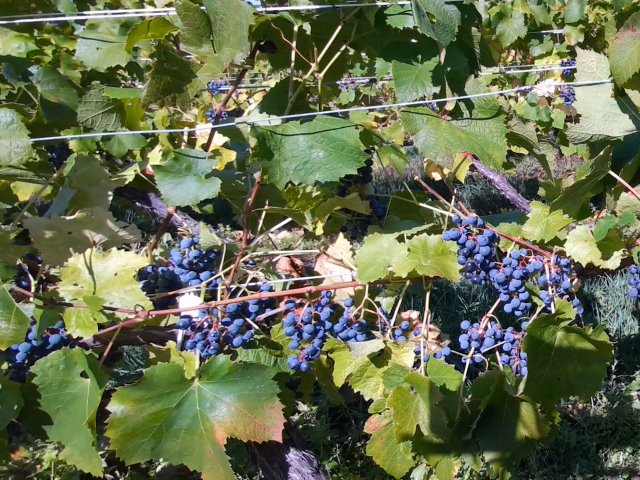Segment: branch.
<instances>
[{"instance_id":"obj_1","label":"branch","mask_w":640,"mask_h":480,"mask_svg":"<svg viewBox=\"0 0 640 480\" xmlns=\"http://www.w3.org/2000/svg\"><path fill=\"white\" fill-rule=\"evenodd\" d=\"M263 179V175L259 174L256 181L253 184L252 187V191L249 195V199L247 202V206H246V210H245V217H244V225H243V231H242V235H243V242L241 247L239 248L237 255H236V259L232 265V268L230 270L229 276L226 279V288L224 290L223 296L221 300H215L206 304H200V305H196L194 307H180V308H176V309H165V310H152V311H146V310H132V309H127V308H120V307H114V306H104L103 310L104 311H112V312H118V313H125V314H129V315H143V316H164V315H168V314H178V313H182V312H197L199 310H203V309H209L218 305H223V304H228V303H240V302H244V301H250V300H258V299H263V298H272V297H280V296H288V295H292V294H309V293H313L315 291H321V290H326V289H348L351 287H356V286H369V285H379V284H388V283H393V284H399V283H405V282H411V283H416V282H421L423 281L422 277H416V278H399V279H378L377 281H370L367 283H359L358 281H353V282H349V283H345V284H323V285H318V286H305L304 288H294V289H289L286 291H277V292H269V293H257V294H253V295H248V296H242V297H237V298H228V295L230 293V288L229 285H231V282L234 279L235 273L237 271L238 265L241 261V257L247 247L248 244V228H249V219H250V212H251V208L252 205L254 203V198L255 195L257 193V189L261 183Z\"/></svg>"},{"instance_id":"obj_2","label":"branch","mask_w":640,"mask_h":480,"mask_svg":"<svg viewBox=\"0 0 640 480\" xmlns=\"http://www.w3.org/2000/svg\"><path fill=\"white\" fill-rule=\"evenodd\" d=\"M359 12V8L355 7L342 21L341 23H339L336 28H335V32L332 34V36L330 37V39L324 44L323 50H320L318 53V56L316 58V60L312 63V65L308 68V70L305 72L304 76L302 77V79L299 81V83L296 85L295 89H294V93L291 94L289 100L286 103L285 109L283 111V114H289L291 106L293 104V102L295 101L296 97L299 95V92L301 90V88L304 86V84L306 83V81L309 79L310 75L312 74V72L315 70V68L321 63L324 54L328 53V49L329 47L334 43V41L336 40V38L338 37V34L340 33V30L346 26L349 21Z\"/></svg>"},{"instance_id":"obj_3","label":"branch","mask_w":640,"mask_h":480,"mask_svg":"<svg viewBox=\"0 0 640 480\" xmlns=\"http://www.w3.org/2000/svg\"><path fill=\"white\" fill-rule=\"evenodd\" d=\"M13 290L15 292L21 294V295L34 297L36 299L41 300L42 302H45V303H48V304L54 305V306L66 307V308H75V309H86L88 307L87 303L77 304V303H68V302L56 301V300L47 298V297H45V296H43L41 294H38L36 292L23 290V289L19 288L18 286H14Z\"/></svg>"},{"instance_id":"obj_4","label":"branch","mask_w":640,"mask_h":480,"mask_svg":"<svg viewBox=\"0 0 640 480\" xmlns=\"http://www.w3.org/2000/svg\"><path fill=\"white\" fill-rule=\"evenodd\" d=\"M484 229H492L495 233L499 234L501 237L508 238L511 241H513L514 243L522 245V246H525V247L529 248L530 250L534 251L537 254L544 255L548 259H553L554 258V255L551 252L545 251L544 249H540V248L534 246L530 242L524 241V240L519 239L517 237H512L511 235H507L505 232L498 230L495 226L487 224V222H484Z\"/></svg>"},{"instance_id":"obj_5","label":"branch","mask_w":640,"mask_h":480,"mask_svg":"<svg viewBox=\"0 0 640 480\" xmlns=\"http://www.w3.org/2000/svg\"><path fill=\"white\" fill-rule=\"evenodd\" d=\"M246 73H247L246 69H243L239 73V75L234 80L233 84L231 85L230 89L226 92V94L224 95L223 99L219 103L218 108H217L216 113H215L214 118H213V124L214 125L218 124V120L220 118V115H221V112H222L224 106L226 105V103L228 102L230 96L234 93V91L236 90L237 86L239 85V83L241 82L243 77L246 75Z\"/></svg>"},{"instance_id":"obj_6","label":"branch","mask_w":640,"mask_h":480,"mask_svg":"<svg viewBox=\"0 0 640 480\" xmlns=\"http://www.w3.org/2000/svg\"><path fill=\"white\" fill-rule=\"evenodd\" d=\"M175 210H176L175 206H172V205L168 206V212H167L165 218L163 219V221H162V223H161V225H160V227H159L154 239L152 240V242L150 244V248L151 249L155 248L156 244L158 243L159 239L161 238V236H162V234H163V232L165 230V227L168 224V222L170 221V219H171V217H172V215H173Z\"/></svg>"},{"instance_id":"obj_7","label":"branch","mask_w":640,"mask_h":480,"mask_svg":"<svg viewBox=\"0 0 640 480\" xmlns=\"http://www.w3.org/2000/svg\"><path fill=\"white\" fill-rule=\"evenodd\" d=\"M446 186L449 189V191L452 193V195L456 198V200L458 201L459 205L461 206V208L463 209V212L467 215H471V212L468 211L464 205V203L462 202V200L460 199V197L455 193L454 189L452 188V186L449 184V182H446Z\"/></svg>"},{"instance_id":"obj_8","label":"branch","mask_w":640,"mask_h":480,"mask_svg":"<svg viewBox=\"0 0 640 480\" xmlns=\"http://www.w3.org/2000/svg\"><path fill=\"white\" fill-rule=\"evenodd\" d=\"M262 41H263V37L259 36L258 39H257V43L253 46L252 50L250 51V54H249V58L250 59L254 58L256 52L258 51V49L262 45Z\"/></svg>"},{"instance_id":"obj_9","label":"branch","mask_w":640,"mask_h":480,"mask_svg":"<svg viewBox=\"0 0 640 480\" xmlns=\"http://www.w3.org/2000/svg\"><path fill=\"white\" fill-rule=\"evenodd\" d=\"M216 133H217V130L211 131V133L209 135V138H208V141L206 142V145L203 148L204 152H208L209 151V149H210V147H211V145L213 143V140H214V138L216 136Z\"/></svg>"}]
</instances>
